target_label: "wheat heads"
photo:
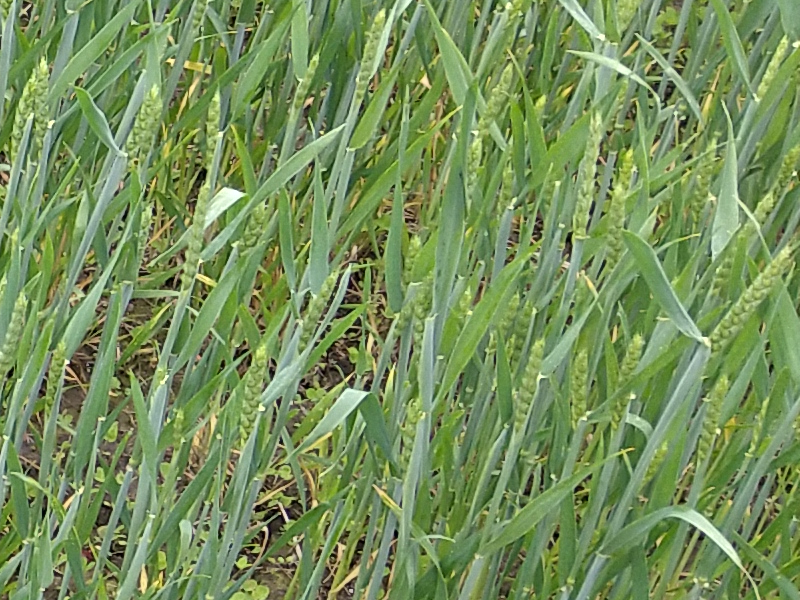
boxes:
[465,138,483,192]
[237,200,264,260]
[457,288,470,319]
[619,0,655,30]
[293,53,317,111]
[7,73,38,157]
[239,347,270,442]
[139,99,162,159]
[489,291,520,345]
[515,299,533,346]
[191,0,220,24]
[503,0,522,33]
[535,94,547,126]
[397,400,423,470]
[611,332,645,423]
[141,206,153,253]
[413,267,435,348]
[183,184,208,292]
[705,246,786,361]
[633,441,669,494]
[517,338,540,427]
[207,90,221,160]
[616,79,630,112]
[577,111,602,224]
[403,238,423,281]
[737,191,773,243]
[619,149,636,193]
[353,8,385,108]
[605,181,623,266]
[698,372,724,464]
[120,80,157,156]
[778,145,800,184]
[174,411,185,449]
[472,61,513,132]
[390,298,410,339]
[618,0,634,15]
[496,165,516,214]
[755,36,789,98]
[690,141,718,221]
[35,57,49,151]
[42,338,65,413]
[296,272,338,352]
[571,349,587,426]
[753,396,770,449]
[0,291,25,375]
